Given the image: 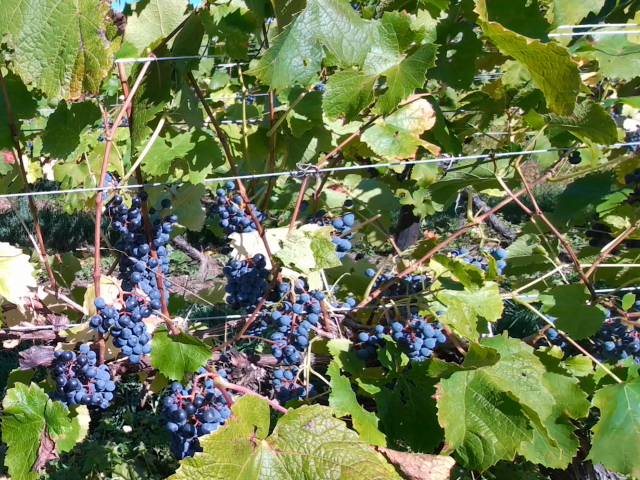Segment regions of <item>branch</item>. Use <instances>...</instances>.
<instances>
[{"instance_id":"30e6481e","label":"branch","mask_w":640,"mask_h":480,"mask_svg":"<svg viewBox=\"0 0 640 480\" xmlns=\"http://www.w3.org/2000/svg\"><path fill=\"white\" fill-rule=\"evenodd\" d=\"M514 167H515L516 175H517V178H518V182L521 185H523V187L518 191V196L520 198H523L525 196V194L527 193L528 203H529V206H530L532 212L534 214H537L542 219V222L544 223V226H545L546 230L553 237L558 239L560 241V243L564 246L565 250L567 251V253L571 256V258L573 260V265L577 269V274L579 275V279H580L581 283L591 290V299L593 301H596L598 299V287L591 280H588L591 277V271L598 265V263L608 253H610L611 251H613L615 249V247L618 245V243L621 241V239L627 233H630L633 230V227L631 225L625 226L619 233H617L614 236V239L611 241V243L608 246H606L605 248H603L600 251V253H598L593 258V260L584 269V266L580 262V258L578 256V253L572 248L571 243L560 232H558L557 230H555L553 228V226L551 224V221H550L549 217L547 216V214L545 212H543L537 206V203L535 201L533 188L538 187L543 182V179L541 177H538L534 181H530L529 182L527 179H525L522 165L519 162H516L514 164ZM518 196L516 194H510L508 196V198L504 199L500 203H497L494 207H491L486 213H484L482 216L478 217L471 224L467 225L462 230L457 231L456 233H454L453 235L449 236L448 238H446L445 240L441 241L440 243L435 244L422 258H420L417 261H414L412 264H410L404 270H402V271L396 273L395 275L391 276L387 280L386 284L381 289H379L377 291L366 290L364 292V294L359 298V302L357 303V306H365L366 305V301L367 302H371L372 300H374L376 298H379V297L383 296L384 294H386L391 289V287L393 286V284L395 282H397L398 280L406 277L412 271H415L417 268H419L422 265H424L438 251L442 250L443 248L447 247L448 245H450L451 243L455 242L456 240H459L460 238H462L465 235L469 234L471 231H473L475 228H477L480 224L484 223L486 220H488L490 217H492L494 214H496L499 210H502L506 206L510 205L513 201H516L518 199Z\"/></svg>"},{"instance_id":"325d2c04","label":"branch","mask_w":640,"mask_h":480,"mask_svg":"<svg viewBox=\"0 0 640 480\" xmlns=\"http://www.w3.org/2000/svg\"><path fill=\"white\" fill-rule=\"evenodd\" d=\"M152 67L150 62H144L141 66L140 70L137 72L135 78L133 79L132 85L127 92V95L123 99L122 104L119 106L117 112L113 116V118L109 121L105 132L103 133L102 139V147H101V165L98 173L97 186H104L105 175L108 167V149H109V141L110 135L115 128V125L120 121L122 115L128 108L130 101L134 97L136 90L139 87L140 81L142 80L144 74L148 69Z\"/></svg>"},{"instance_id":"170604dd","label":"branch","mask_w":640,"mask_h":480,"mask_svg":"<svg viewBox=\"0 0 640 480\" xmlns=\"http://www.w3.org/2000/svg\"><path fill=\"white\" fill-rule=\"evenodd\" d=\"M188 74L190 76L193 87L195 88L196 93L199 95L201 102L204 104L206 112L210 116V120L213 122L215 128L217 129V134L222 142L223 149L225 151V155L227 156V160L229 163L230 170L233 176L239 175V170L237 168V164L234 158V154L232 153V149L229 144V140L224 132V127L222 126L220 120L217 118L216 112L213 110L211 102L208 100L206 93L203 91L202 86L199 83L196 71L193 67L188 69Z\"/></svg>"},{"instance_id":"45aa463d","label":"branch","mask_w":640,"mask_h":480,"mask_svg":"<svg viewBox=\"0 0 640 480\" xmlns=\"http://www.w3.org/2000/svg\"><path fill=\"white\" fill-rule=\"evenodd\" d=\"M103 191H97L93 200V219H94V246H93V280L95 283L94 296L99 298L102 293V280L100 278V248H101V217L100 202Z\"/></svg>"},{"instance_id":"982ccf7c","label":"branch","mask_w":640,"mask_h":480,"mask_svg":"<svg viewBox=\"0 0 640 480\" xmlns=\"http://www.w3.org/2000/svg\"><path fill=\"white\" fill-rule=\"evenodd\" d=\"M257 232L259 234L261 245H262V248L264 250V253L266 254L267 258L270 260V262H271V264H272V266L274 268L276 281L278 283H281L283 281L282 269H281V266H280L277 258L274 256L273 252L271 251V248L269 246L268 238H267V235H266L264 227L262 225H259L257 227Z\"/></svg>"},{"instance_id":"1ff4a987","label":"branch","mask_w":640,"mask_h":480,"mask_svg":"<svg viewBox=\"0 0 640 480\" xmlns=\"http://www.w3.org/2000/svg\"><path fill=\"white\" fill-rule=\"evenodd\" d=\"M363 133H364V129L360 128L358 131H356L353 134H351L348 137H346L341 143L338 144V146L334 150H332L329 153H326L325 156L322 158V160L319 163L315 162L314 163V167L315 168H321L328 161L329 158H331L334 155H336L337 153H339L343 149V147L346 146L351 140H353L356 137L362 135Z\"/></svg>"},{"instance_id":"ea751061","label":"branch","mask_w":640,"mask_h":480,"mask_svg":"<svg viewBox=\"0 0 640 480\" xmlns=\"http://www.w3.org/2000/svg\"><path fill=\"white\" fill-rule=\"evenodd\" d=\"M309 177H310V173L309 172H306L305 175L303 176L302 186H301V193H300V195L298 197L294 213L289 218V222H288V229L290 231H294L295 230V227L293 226V224H294L295 219L299 215L303 199H304V197L306 195V188H307V182H308Z\"/></svg>"},{"instance_id":"ca6c30ca","label":"branch","mask_w":640,"mask_h":480,"mask_svg":"<svg viewBox=\"0 0 640 480\" xmlns=\"http://www.w3.org/2000/svg\"><path fill=\"white\" fill-rule=\"evenodd\" d=\"M238 192L243 197V202L249 204L251 202L250 195L243 185V181H235Z\"/></svg>"}]
</instances>
